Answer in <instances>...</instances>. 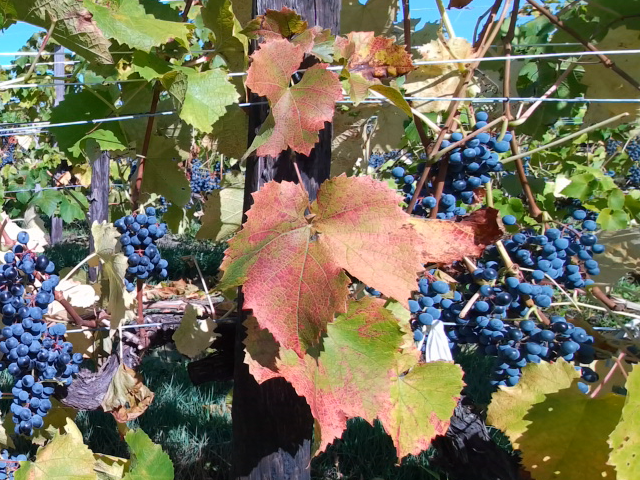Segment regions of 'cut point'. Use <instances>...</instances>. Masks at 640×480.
Wrapping results in <instances>:
<instances>
[{
  "mask_svg": "<svg viewBox=\"0 0 640 480\" xmlns=\"http://www.w3.org/2000/svg\"><path fill=\"white\" fill-rule=\"evenodd\" d=\"M452 120L455 121L459 125V128L461 129V133H464V127L462 126V122L459 121V119L454 117V116H453Z\"/></svg>",
  "mask_w": 640,
  "mask_h": 480,
  "instance_id": "cut-point-2",
  "label": "cut point"
},
{
  "mask_svg": "<svg viewBox=\"0 0 640 480\" xmlns=\"http://www.w3.org/2000/svg\"><path fill=\"white\" fill-rule=\"evenodd\" d=\"M540 212L542 213V221H541V233L545 232V228L547 225V217L549 219V222L553 225V226H557V223L554 222V220L552 219V216L550 215V213H548L547 211L544 210H540Z\"/></svg>",
  "mask_w": 640,
  "mask_h": 480,
  "instance_id": "cut-point-1",
  "label": "cut point"
}]
</instances>
